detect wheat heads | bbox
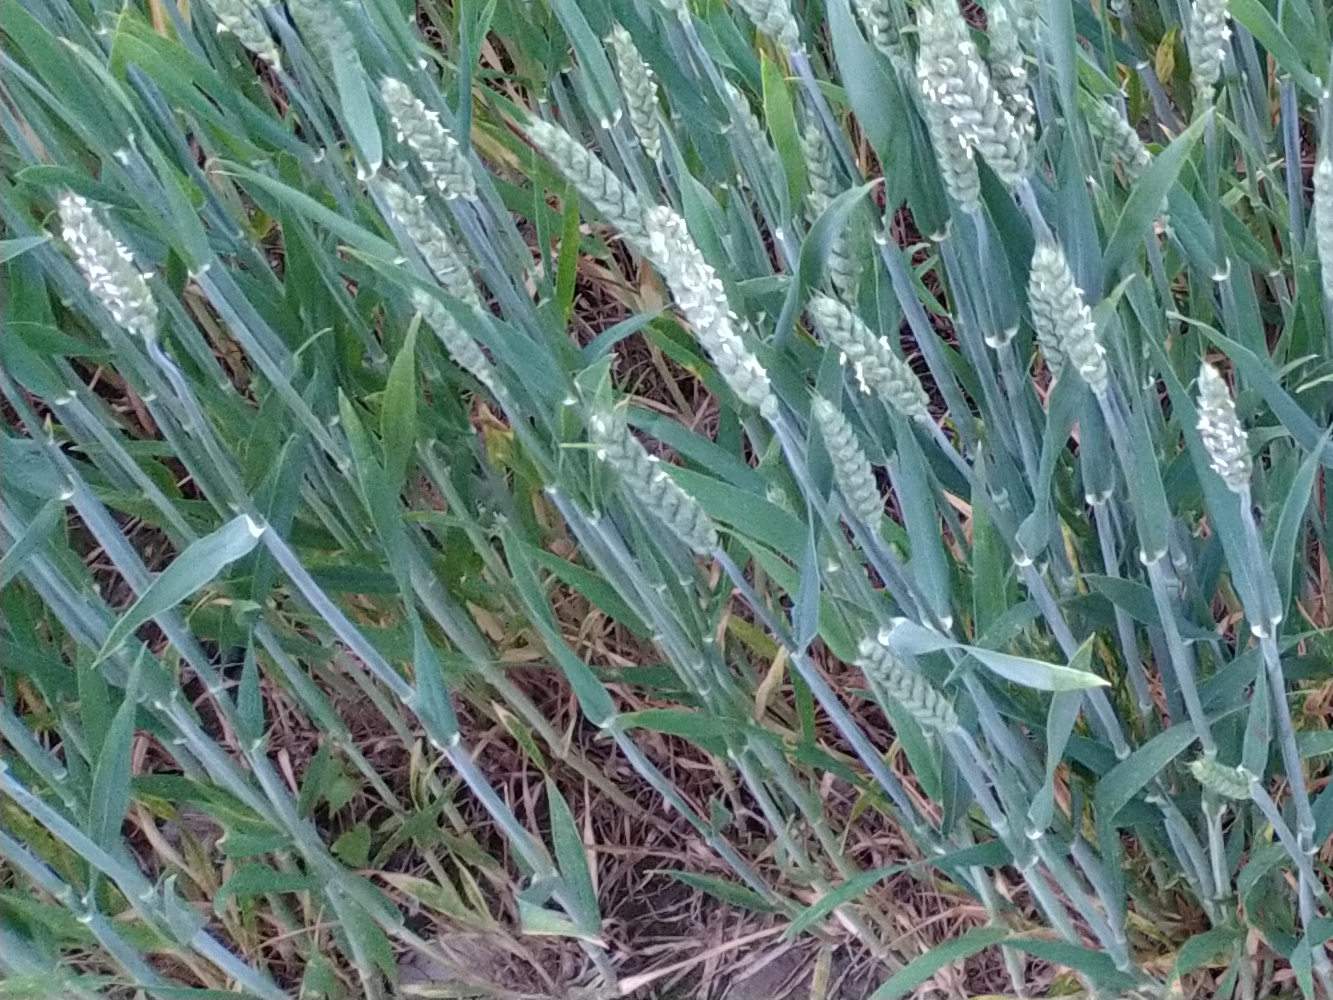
[1192,758,1253,799]
[701,0,799,49]
[874,0,904,52]
[919,10,1032,175]
[917,91,970,193]
[589,416,720,554]
[987,7,1037,113]
[1191,0,1231,111]
[185,0,276,62]
[927,0,980,70]
[727,86,783,194]
[656,207,727,314]
[524,123,657,259]
[646,233,766,414]
[801,125,837,219]
[413,293,501,392]
[262,0,362,69]
[814,399,882,527]
[833,220,867,308]
[1315,160,1333,314]
[379,80,475,197]
[380,181,479,311]
[857,640,957,731]
[58,198,158,336]
[613,27,662,156]
[1079,92,1150,186]
[1027,276,1063,384]
[810,300,928,415]
[1033,249,1108,390]
[1196,363,1253,487]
